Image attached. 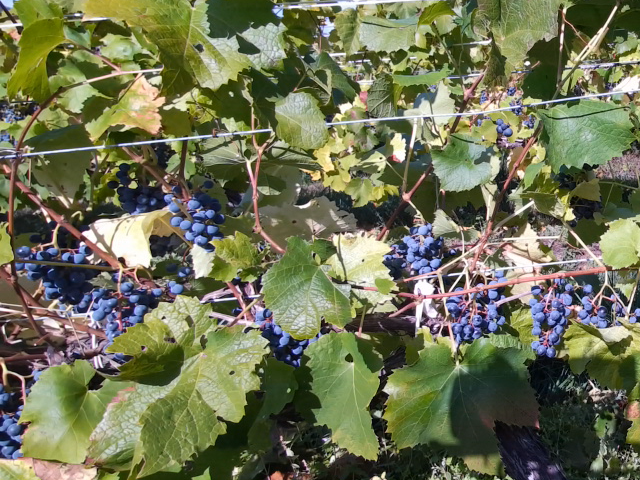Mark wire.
<instances>
[{"instance_id": "d2f4af69", "label": "wire", "mask_w": 640, "mask_h": 480, "mask_svg": "<svg viewBox=\"0 0 640 480\" xmlns=\"http://www.w3.org/2000/svg\"><path fill=\"white\" fill-rule=\"evenodd\" d=\"M632 93H640V88H630V89H618V90H609L598 93H582L579 95L569 96L566 98L559 99H547L541 100L535 103L528 104H515L507 108L502 109H487L479 112H463V113H451V112H423L417 114H402L395 116H382V117H369L364 119H346L339 121H329L326 123L327 127L331 126H342L348 124H366L371 122H384V121H398L405 119H419L425 117H449V118H465V117H481L489 114H505L518 109H530V108H538L544 105L549 104H562L569 103L576 100H581L585 98H600L611 95H620V94H632Z\"/></svg>"}, {"instance_id": "a73af890", "label": "wire", "mask_w": 640, "mask_h": 480, "mask_svg": "<svg viewBox=\"0 0 640 480\" xmlns=\"http://www.w3.org/2000/svg\"><path fill=\"white\" fill-rule=\"evenodd\" d=\"M273 131H274L273 127H268V128L249 129V130H235V131L206 134V135H195L190 137L178 136V137H168V138L135 140L132 142H120V143H114V144L84 145V146H78V147H60V148H53V149L44 150L40 152H26L23 154L0 155V160L25 159L28 157H43V156L62 153V152H80V151H86V150H104V149H116V148H122V147L131 148L134 146L147 145V144L171 143V142H180V141L192 142V141H198V140L224 138V137H231V136H237V135L270 133Z\"/></svg>"}, {"instance_id": "4f2155b8", "label": "wire", "mask_w": 640, "mask_h": 480, "mask_svg": "<svg viewBox=\"0 0 640 480\" xmlns=\"http://www.w3.org/2000/svg\"><path fill=\"white\" fill-rule=\"evenodd\" d=\"M595 258L593 256L585 257V258H568V259H560V260H545L540 262H528L525 264H515V265H502L491 268H482L478 270H473V275H480L484 273H493L504 270H520L527 269L530 267H542L548 265H562V264H571V263H588L594 262Z\"/></svg>"}, {"instance_id": "f0478fcc", "label": "wire", "mask_w": 640, "mask_h": 480, "mask_svg": "<svg viewBox=\"0 0 640 480\" xmlns=\"http://www.w3.org/2000/svg\"><path fill=\"white\" fill-rule=\"evenodd\" d=\"M237 296L236 295H227V296H221L219 298L216 299H212V300H200L199 304L200 305H214V304H218L224 301H230V300H236Z\"/></svg>"}]
</instances>
